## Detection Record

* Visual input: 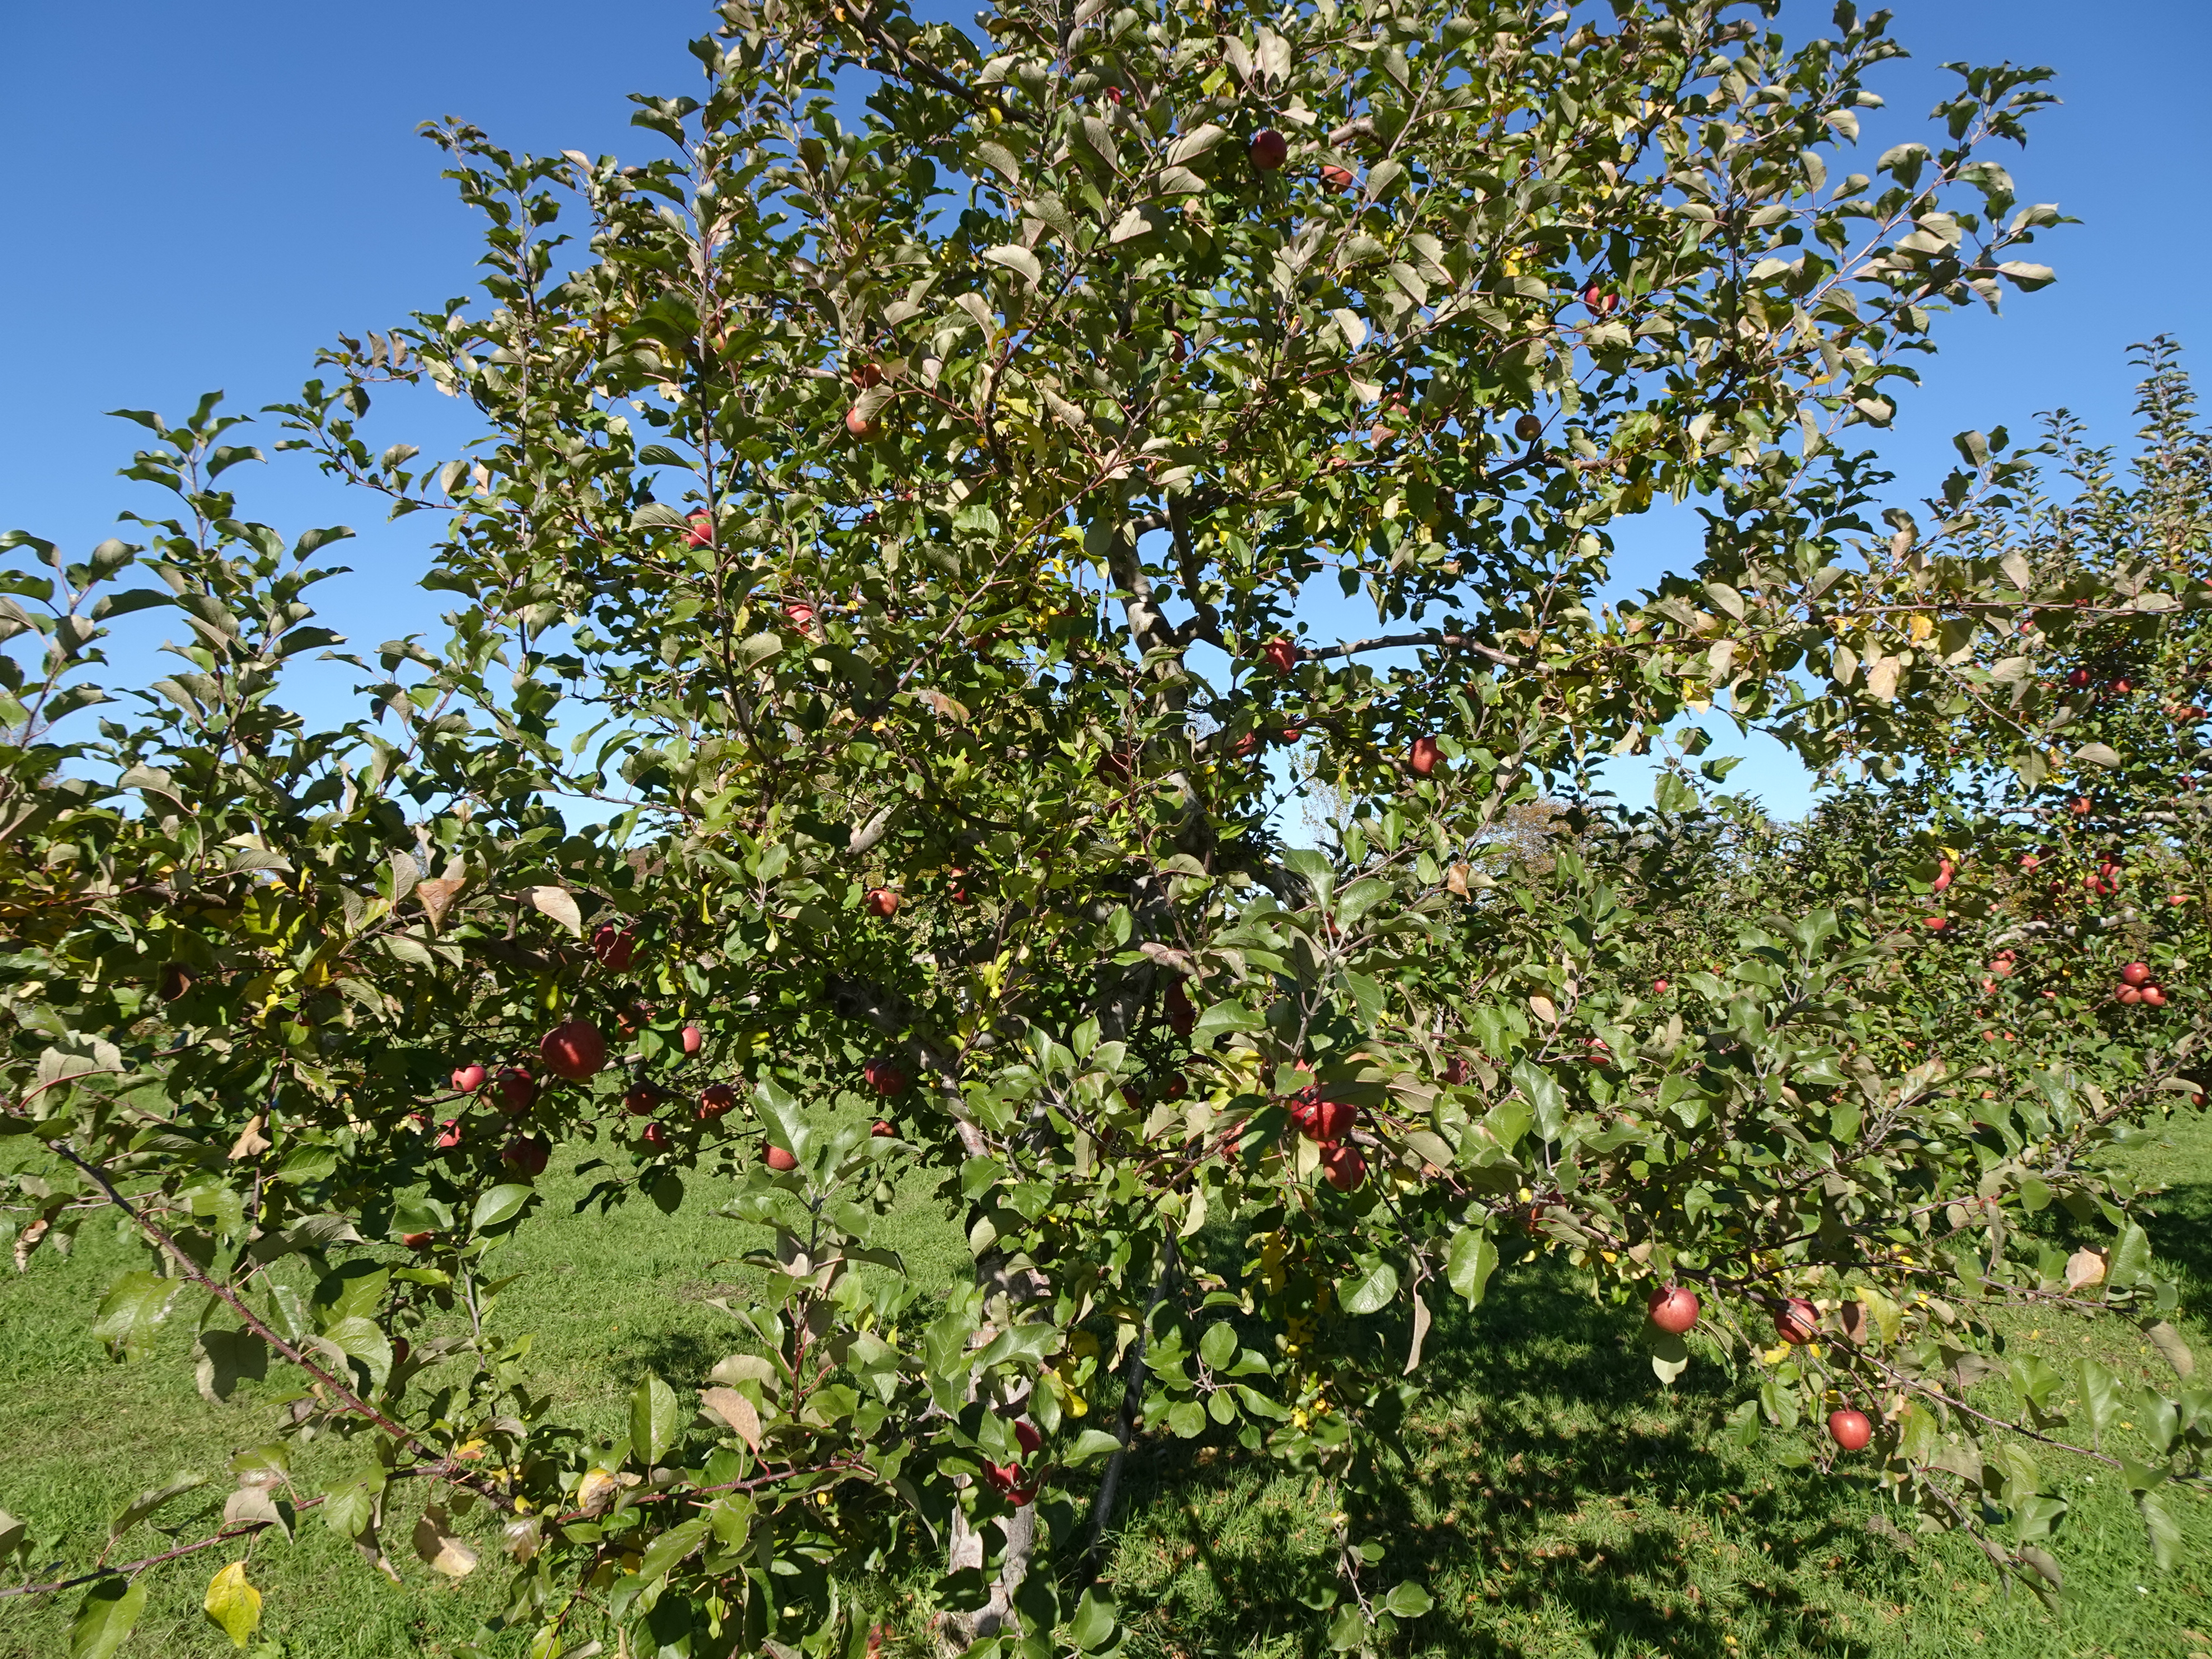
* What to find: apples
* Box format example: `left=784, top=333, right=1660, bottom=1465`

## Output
left=1711, top=966, right=1730, bottom=981
left=1772, top=1296, right=1828, bottom=1346
left=482, top=1144, right=507, bottom=1170
left=1225, top=158, right=1251, bottom=185
left=1316, top=158, right=1356, bottom=196
left=700, top=1082, right=738, bottom=1115
left=867, top=1120, right=895, bottom=1145
left=482, top=1082, right=510, bottom=1113
left=904, top=487, right=926, bottom=506
left=2044, top=751, right=2066, bottom=776
left=937, top=867, right=969, bottom=905
left=1228, top=729, right=1258, bottom=758
left=1462, top=678, right=1492, bottom=708
left=1167, top=1068, right=1208, bottom=1107
left=403, top=1112, right=434, bottom=1145
left=2111, top=673, right=2134, bottom=695
left=2199, top=577, right=2212, bottom=594
left=2168, top=890, right=2189, bottom=907
left=1292, top=1052, right=1335, bottom=1092
left=921, top=1610, right=947, bottom=1641
left=437, top=1118, right=471, bottom=1156
left=2101, top=862, right=2128, bottom=883
left=848, top=358, right=884, bottom=389
left=2123, top=961, right=2150, bottom=987
left=1717, top=1495, right=1740, bottom=1520
left=2170, top=686, right=2187, bottom=704
left=606, top=296, right=640, bottom=327
left=2021, top=710, right=2038, bottom=727
left=1260, top=632, right=1295, bottom=679
left=1935, top=712, right=1952, bottom=731
left=1937, top=858, right=1960, bottom=877
left=852, top=1622, right=901, bottom=1659
left=863, top=1056, right=909, bottom=1094
left=1217, top=1127, right=1259, bottom=1164
left=2185, top=702, right=2206, bottom=725
left=2073, top=598, right=2083, bottom=605
left=2082, top=594, right=2094, bottom=604
left=1470, top=1041, right=1510, bottom=1070
left=1279, top=718, right=1302, bottom=745
left=1941, top=740, right=1962, bottom=755
left=2067, top=667, right=2094, bottom=690
left=2033, top=677, right=2054, bottom=698
left=1047, top=602, right=1084, bottom=642
left=1108, top=1084, right=1143, bottom=1114
left=2012, top=852, right=2039, bottom=878
left=1898, top=1036, right=1922, bottom=1056
left=2094, top=878, right=2118, bottom=898
left=453, top=1063, right=489, bottom=1095
left=760, top=1129, right=805, bottom=1173
left=1306, top=1136, right=1341, bottom=1167
left=1192, top=0, right=1223, bottom=23
left=1108, top=795, right=1138, bottom=828
left=2181, top=774, right=2197, bottom=789
left=1080, top=1117, right=1120, bottom=1145
left=1, top=896, right=39, bottom=938
left=1965, top=1088, right=2001, bottom=1127
left=1827, top=1410, right=1873, bottom=1452
left=640, top=1122, right=671, bottom=1153
left=1921, top=911, right=1947, bottom=931
left=1976, top=1195, right=1997, bottom=1212
left=1408, top=736, right=1451, bottom=774
left=844, top=398, right=882, bottom=436
left=676, top=508, right=718, bottom=552
left=2068, top=796, right=2091, bottom=815
left=1094, top=750, right=1137, bottom=790
left=1817, top=1086, right=1846, bottom=1107
left=999, top=1464, right=1041, bottom=1512
left=610, top=1004, right=647, bottom=1041
left=985, top=1418, right=1045, bottom=1492
left=1649, top=978, right=1672, bottom=998
left=1380, top=390, right=1414, bottom=421
left=1323, top=1147, right=1367, bottom=1194
left=1575, top=1029, right=1614, bottom=1064
left=861, top=511, right=884, bottom=529
left=540, top=1019, right=610, bottom=1079
left=967, top=617, right=1009, bottom=651
left=1989, top=901, right=2003, bottom=913
left=1328, top=456, right=1355, bottom=483
left=710, top=323, right=751, bottom=357
left=1974, top=978, right=2001, bottom=1003
left=780, top=602, right=821, bottom=638
left=1974, top=662, right=1983, bottom=670
left=2141, top=982, right=2167, bottom=1007
left=1900, top=925, right=1921, bottom=944
left=867, top=884, right=902, bottom=916
left=1514, top=413, right=1544, bottom=442
left=1931, top=872, right=1951, bottom=888
left=2162, top=705, right=2184, bottom=722
left=1582, top=279, right=1620, bottom=316
left=404, top=1225, right=432, bottom=1253
left=1315, top=901, right=1350, bottom=933
left=624, top=1082, right=664, bottom=1115
left=1028, top=846, right=1057, bottom=876
left=1513, top=1187, right=1566, bottom=1237
left=1986, top=947, right=2020, bottom=978
left=1152, top=325, right=1186, bottom=367
left=2038, top=988, right=2057, bottom=1008
left=2188, top=1093, right=2203, bottom=1107
left=1433, top=485, right=1460, bottom=513
left=493, top=1069, right=529, bottom=1113
left=596, top=923, right=649, bottom=974
left=1439, top=1046, right=1480, bottom=1086
left=2018, top=620, right=2038, bottom=638
left=1289, top=1084, right=1358, bottom=1143
left=936, top=240, right=972, bottom=278
left=667, top=1024, right=702, bottom=1054
left=1248, top=128, right=1290, bottom=174
left=2080, top=864, right=2106, bottom=888
left=502, top=1125, right=548, bottom=1174
left=1162, top=375, right=1190, bottom=395
left=716, top=1577, right=743, bottom=1602
left=2114, top=982, right=2141, bottom=1006
left=1981, top=1018, right=2016, bottom=1047
left=1092, top=83, right=1127, bottom=110
left=1833, top=976, right=1857, bottom=996
left=1647, top=1286, right=1700, bottom=1334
